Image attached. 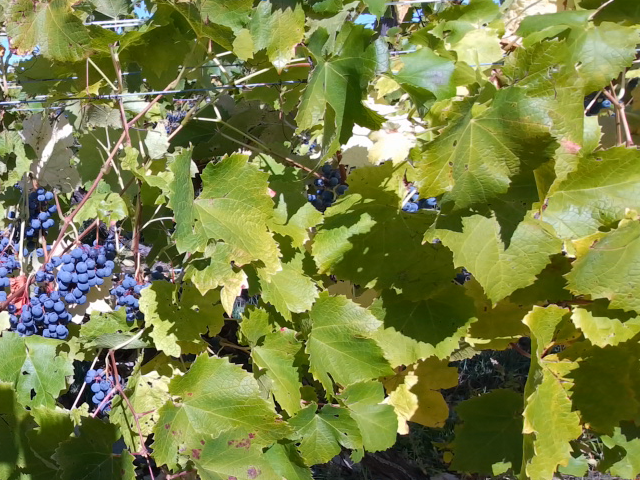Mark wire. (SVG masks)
<instances>
[{"instance_id":"obj_1","label":"wire","mask_w":640,"mask_h":480,"mask_svg":"<svg viewBox=\"0 0 640 480\" xmlns=\"http://www.w3.org/2000/svg\"><path fill=\"white\" fill-rule=\"evenodd\" d=\"M307 79H285L279 81H260V82H237V83H225V84H217V85H205V86H191V87H183L177 89H167V90H154V91H136L131 93H121V94H99V95H91L86 97H60V102H88L93 100H101V99H123V98H133L138 96H157V95H169V94H179L185 92H193V91H207V90H219V89H229V88H240V87H262V86H281L287 84H307Z\"/></svg>"},{"instance_id":"obj_2","label":"wire","mask_w":640,"mask_h":480,"mask_svg":"<svg viewBox=\"0 0 640 480\" xmlns=\"http://www.w3.org/2000/svg\"><path fill=\"white\" fill-rule=\"evenodd\" d=\"M148 17L132 18V19H99L93 21H86V26L102 25L103 29H117V28H135L143 27L145 22H148Z\"/></svg>"}]
</instances>
